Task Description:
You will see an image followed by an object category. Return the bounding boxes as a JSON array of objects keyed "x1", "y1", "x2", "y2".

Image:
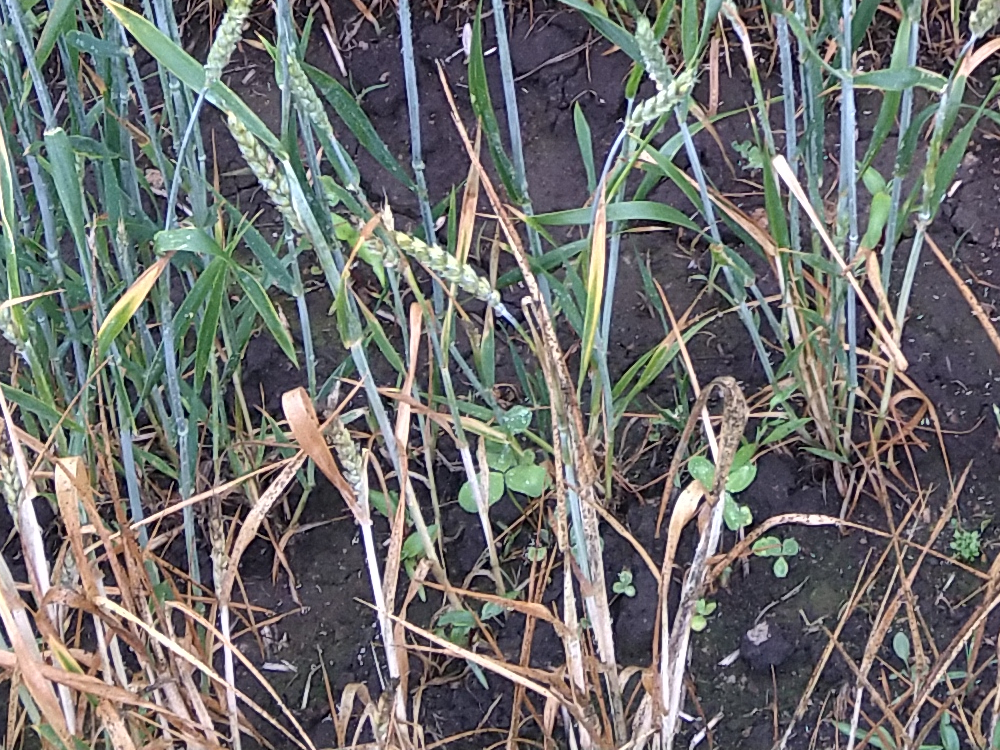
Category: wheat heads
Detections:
[
  {"x1": 207, "y1": 0, "x2": 262, "y2": 82},
  {"x1": 971, "y1": 0, "x2": 1000, "y2": 35},
  {"x1": 719, "y1": 383, "x2": 747, "y2": 479},
  {"x1": 631, "y1": 20, "x2": 693, "y2": 140},
  {"x1": 0, "y1": 428, "x2": 24, "y2": 531},
  {"x1": 327, "y1": 405, "x2": 362, "y2": 487},
  {"x1": 391, "y1": 232, "x2": 495, "y2": 300},
  {"x1": 101, "y1": 0, "x2": 125, "y2": 32},
  {"x1": 286, "y1": 52, "x2": 331, "y2": 142},
  {"x1": 226, "y1": 113, "x2": 304, "y2": 232},
  {"x1": 612, "y1": 71, "x2": 695, "y2": 195},
  {"x1": 537, "y1": 301, "x2": 575, "y2": 429}
]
